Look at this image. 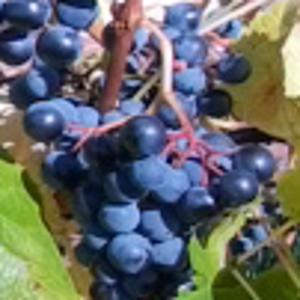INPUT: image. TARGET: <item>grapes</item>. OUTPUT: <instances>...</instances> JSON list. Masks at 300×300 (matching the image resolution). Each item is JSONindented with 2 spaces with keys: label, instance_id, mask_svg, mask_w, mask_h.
<instances>
[{
  "label": "grapes",
  "instance_id": "obj_4",
  "mask_svg": "<svg viewBox=\"0 0 300 300\" xmlns=\"http://www.w3.org/2000/svg\"><path fill=\"white\" fill-rule=\"evenodd\" d=\"M214 36L221 41H234L242 34V25L237 20H227L213 28Z\"/></svg>",
  "mask_w": 300,
  "mask_h": 300
},
{
  "label": "grapes",
  "instance_id": "obj_3",
  "mask_svg": "<svg viewBox=\"0 0 300 300\" xmlns=\"http://www.w3.org/2000/svg\"><path fill=\"white\" fill-rule=\"evenodd\" d=\"M150 43L151 37L146 30L139 28L134 31L127 53L126 70L128 73L135 74L140 71L141 66L147 64L148 57L143 51Z\"/></svg>",
  "mask_w": 300,
  "mask_h": 300
},
{
  "label": "grapes",
  "instance_id": "obj_1",
  "mask_svg": "<svg viewBox=\"0 0 300 300\" xmlns=\"http://www.w3.org/2000/svg\"><path fill=\"white\" fill-rule=\"evenodd\" d=\"M99 0H0V58L26 65L10 84V101L24 111L21 129L48 146L40 172L48 186L71 185L72 208L87 221L76 248L94 279L96 300H172L192 294L189 234L205 246L227 210L256 202L260 184L277 173L274 148L236 140L203 126L234 111L203 68L210 54L199 32L204 10L174 4L161 26L176 57L175 97L161 104L139 78L123 80L117 106L103 113L71 96L57 97L61 69L75 65L83 36L99 20Z\"/></svg>",
  "mask_w": 300,
  "mask_h": 300
},
{
  "label": "grapes",
  "instance_id": "obj_2",
  "mask_svg": "<svg viewBox=\"0 0 300 300\" xmlns=\"http://www.w3.org/2000/svg\"><path fill=\"white\" fill-rule=\"evenodd\" d=\"M216 78L231 86H241L252 76V65L239 54L224 52L212 62Z\"/></svg>",
  "mask_w": 300,
  "mask_h": 300
}]
</instances>
